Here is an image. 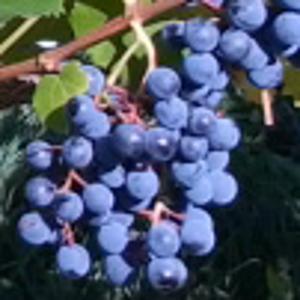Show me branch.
<instances>
[{
    "mask_svg": "<svg viewBox=\"0 0 300 300\" xmlns=\"http://www.w3.org/2000/svg\"><path fill=\"white\" fill-rule=\"evenodd\" d=\"M191 0H157L152 6L137 11L132 15L121 17L98 31L88 34L81 39L71 41L66 46L38 57L25 60L6 67H0V82H12L15 79L27 77L52 68L67 59L75 57L88 47L100 46L124 32L134 28L137 24L162 16L176 6H186Z\"/></svg>",
    "mask_w": 300,
    "mask_h": 300,
    "instance_id": "30e6481e",
    "label": "branch"
}]
</instances>
